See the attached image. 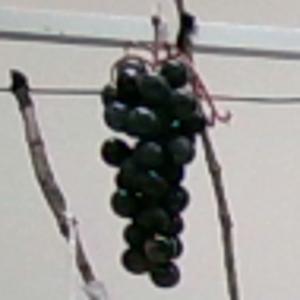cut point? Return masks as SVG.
<instances>
[{
  "label": "cut point",
  "mask_w": 300,
  "mask_h": 300,
  "mask_svg": "<svg viewBox=\"0 0 300 300\" xmlns=\"http://www.w3.org/2000/svg\"><path fill=\"white\" fill-rule=\"evenodd\" d=\"M151 18L149 20L153 28V49L151 57L150 71H157L159 66V34L163 29V19L161 18V0H152Z\"/></svg>",
  "instance_id": "1"
}]
</instances>
